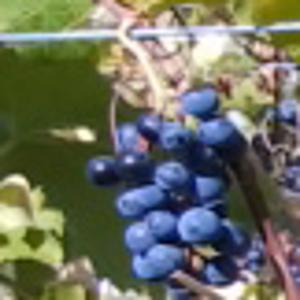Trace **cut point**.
<instances>
[{"mask_svg": "<svg viewBox=\"0 0 300 300\" xmlns=\"http://www.w3.org/2000/svg\"><path fill=\"white\" fill-rule=\"evenodd\" d=\"M129 27L130 24L125 19L120 22L119 40L123 46L132 50L144 63L145 69L149 75V85L153 90V101L155 103H160L164 97V90L158 80V70L152 57L144 50V48L138 42L129 40L126 37V32L129 30Z\"/></svg>", "mask_w": 300, "mask_h": 300, "instance_id": "cut-point-1", "label": "cut point"}]
</instances>
